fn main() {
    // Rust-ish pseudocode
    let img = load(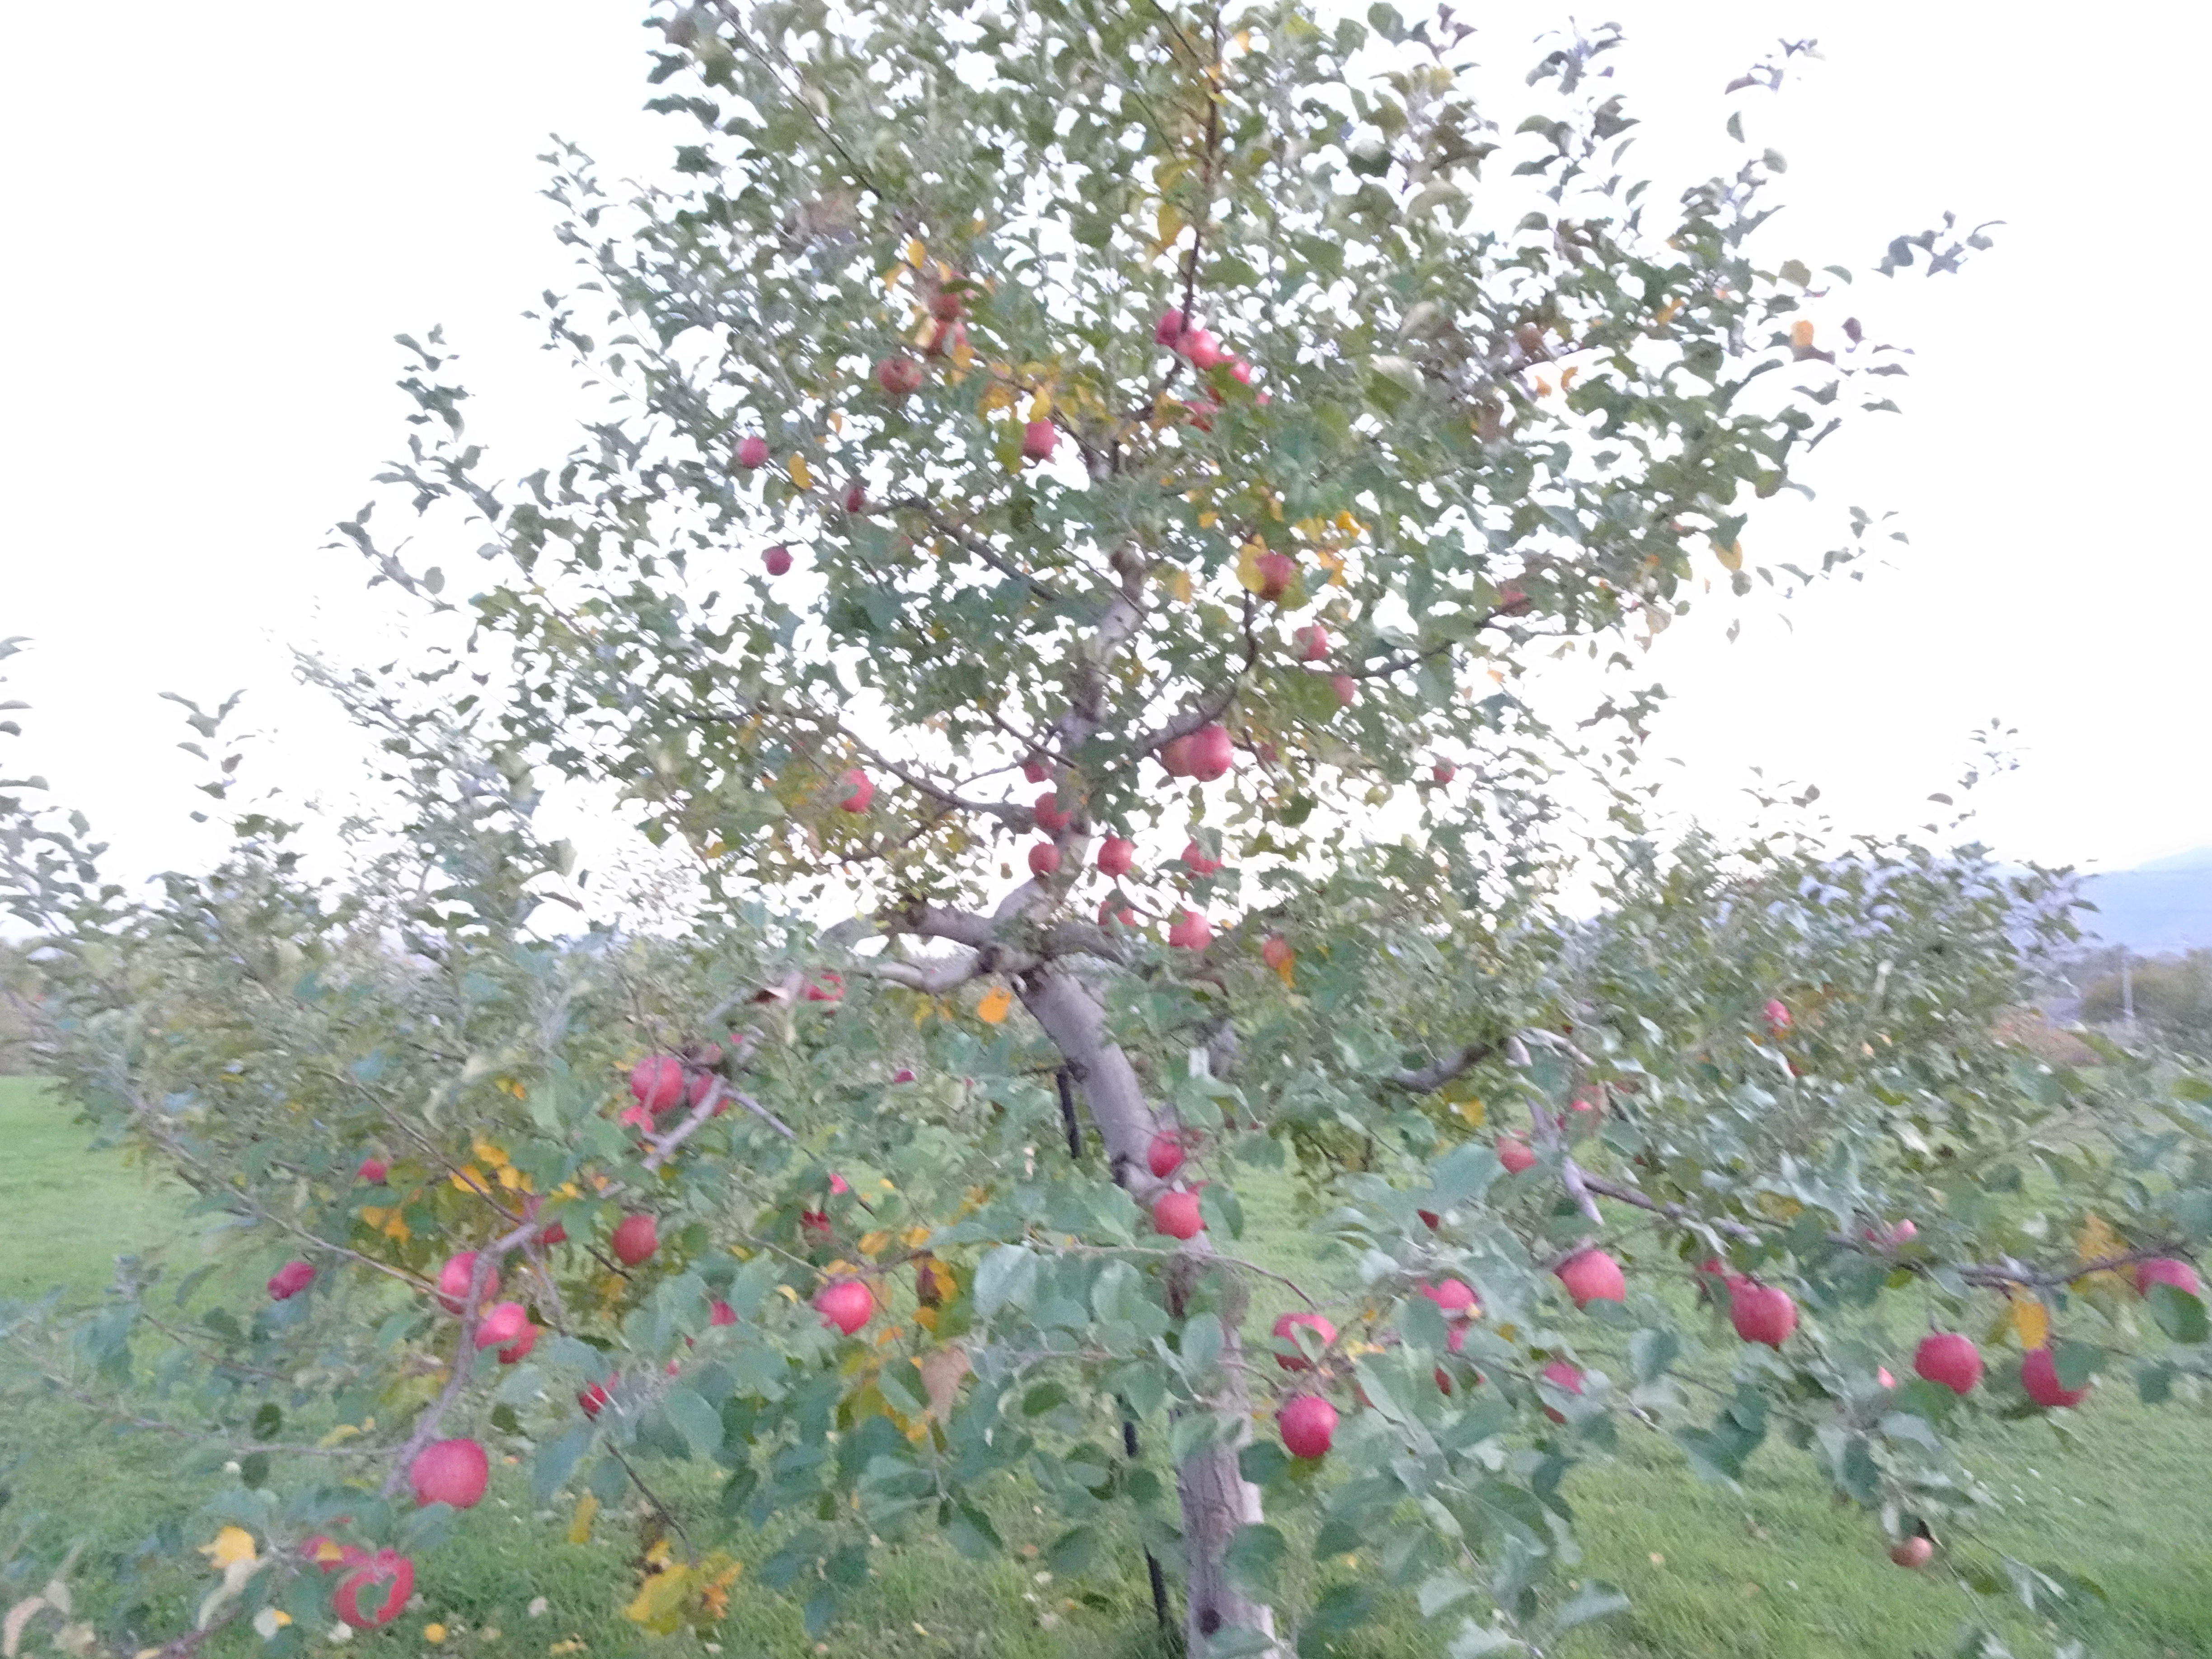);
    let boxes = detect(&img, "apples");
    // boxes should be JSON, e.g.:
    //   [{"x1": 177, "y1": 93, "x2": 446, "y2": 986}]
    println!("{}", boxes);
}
[
  {"x1": 616, "y1": 1107, "x2": 655, "y2": 1150},
  {"x1": 1481, "y1": 427, "x2": 1501, "y2": 445},
  {"x1": 2021, "y1": 1342, "x2": 2092, "y2": 1407},
  {"x1": 1410, "y1": 1270, "x2": 1477, "y2": 1352},
  {"x1": 1152, "y1": 1190, "x2": 1204, "y2": 1240},
  {"x1": 1890, "y1": 1534, "x2": 1933, "y2": 1569},
  {"x1": 691, "y1": 1073, "x2": 730, "y2": 1120},
  {"x1": 613, "y1": 1215, "x2": 670, "y2": 1275},
  {"x1": 436, "y1": 1250, "x2": 501, "y2": 1314},
  {"x1": 1786, "y1": 1062, "x2": 1810, "y2": 1084},
  {"x1": 877, "y1": 352, "x2": 927, "y2": 397},
  {"x1": 1539, "y1": 1356, "x2": 1606, "y2": 1425},
  {"x1": 1645, "y1": 551, "x2": 1670, "y2": 572},
  {"x1": 1033, "y1": 792, "x2": 1075, "y2": 831},
  {"x1": 410, "y1": 1438, "x2": 490, "y2": 1511},
  {"x1": 2136, "y1": 1255, "x2": 2200, "y2": 1320},
  {"x1": 1516, "y1": 327, "x2": 1544, "y2": 353},
  {"x1": 803, "y1": 1216, "x2": 848, "y2": 1251},
  {"x1": 686, "y1": 1291, "x2": 739, "y2": 1346},
  {"x1": 581, "y1": 1364, "x2": 631, "y2": 1415},
  {"x1": 1281, "y1": 1393, "x2": 1340, "y2": 1459},
  {"x1": 633, "y1": 1057, "x2": 686, "y2": 1112},
  {"x1": 1196, "y1": 164, "x2": 1226, "y2": 186},
  {"x1": 839, "y1": 482, "x2": 870, "y2": 513},
  {"x1": 1322, "y1": 671, "x2": 1356, "y2": 706},
  {"x1": 1241, "y1": 390, "x2": 1277, "y2": 421},
  {"x1": 1209, "y1": 354, "x2": 1252, "y2": 398},
  {"x1": 267, "y1": 1258, "x2": 320, "y2": 1305},
  {"x1": 1561, "y1": 998, "x2": 1599, "y2": 1037},
  {"x1": 1494, "y1": 575, "x2": 1537, "y2": 618},
  {"x1": 1177, "y1": 328, "x2": 1220, "y2": 368},
  {"x1": 790, "y1": 738, "x2": 818, "y2": 761},
  {"x1": 1154, "y1": 307, "x2": 1194, "y2": 345},
  {"x1": 1249, "y1": 553, "x2": 1298, "y2": 604},
  {"x1": 1224, "y1": 1114, "x2": 1243, "y2": 1134},
  {"x1": 1097, "y1": 894, "x2": 1135, "y2": 939},
  {"x1": 1727, "y1": 1282, "x2": 1796, "y2": 1342},
  {"x1": 643, "y1": 1349, "x2": 683, "y2": 1390},
  {"x1": 708, "y1": 1032, "x2": 757, "y2": 1077},
  {"x1": 1420, "y1": 1355, "x2": 1488, "y2": 1415},
  {"x1": 1146, "y1": 1127, "x2": 1205, "y2": 1180},
  {"x1": 1913, "y1": 1330, "x2": 1984, "y2": 1396},
  {"x1": 1024, "y1": 750, "x2": 1052, "y2": 784},
  {"x1": 297, "y1": 1516, "x2": 358, "y2": 1578},
  {"x1": 803, "y1": 1170, "x2": 850, "y2": 1221},
  {"x1": 1429, "y1": 313, "x2": 1456, "y2": 340},
  {"x1": 765, "y1": 546, "x2": 792, "y2": 575},
  {"x1": 1492, "y1": 1127, "x2": 1545, "y2": 1175},
  {"x1": 1745, "y1": 991, "x2": 1792, "y2": 1044},
  {"x1": 816, "y1": 1281, "x2": 874, "y2": 1337},
  {"x1": 923, "y1": 271, "x2": 972, "y2": 323},
  {"x1": 1186, "y1": 726, "x2": 1233, "y2": 782},
  {"x1": 334, "y1": 1548, "x2": 415, "y2": 1629},
  {"x1": 1161, "y1": 735, "x2": 1207, "y2": 778},
  {"x1": 1263, "y1": 934, "x2": 1303, "y2": 971},
  {"x1": 918, "y1": 316, "x2": 969, "y2": 366},
  {"x1": 1553, "y1": 1239, "x2": 1628, "y2": 1317},
  {"x1": 1256, "y1": 744, "x2": 1287, "y2": 776},
  {"x1": 1859, "y1": 1366, "x2": 1898, "y2": 1404},
  {"x1": 1863, "y1": 1211, "x2": 1918, "y2": 1262},
  {"x1": 1113, "y1": 539, "x2": 1138, "y2": 563},
  {"x1": 738, "y1": 436, "x2": 770, "y2": 468},
  {"x1": 915, "y1": 1261, "x2": 968, "y2": 1312},
  {"x1": 1180, "y1": 396, "x2": 1222, "y2": 439},
  {"x1": 953, "y1": 1074, "x2": 978, "y2": 1099},
  {"x1": 1432, "y1": 760, "x2": 1458, "y2": 784},
  {"x1": 1195, "y1": 389, "x2": 1242, "y2": 423},
  {"x1": 1694, "y1": 1248, "x2": 1752, "y2": 1303},
  {"x1": 1247, "y1": 1119, "x2": 1266, "y2": 1137},
  {"x1": 1473, "y1": 404, "x2": 1501, "y2": 428},
  {"x1": 1271, "y1": 1313, "x2": 1338, "y2": 1374},
  {"x1": 1611, "y1": 1079, "x2": 1633, "y2": 1099},
  {"x1": 520, "y1": 1192, "x2": 577, "y2": 1245},
  {"x1": 1028, "y1": 841, "x2": 1064, "y2": 877},
  {"x1": 1292, "y1": 625, "x2": 1328, "y2": 663},
  {"x1": 1167, "y1": 910, "x2": 1213, "y2": 956},
  {"x1": 1555, "y1": 1082, "x2": 1616, "y2": 1130},
  {"x1": 1862, "y1": 1030, "x2": 1894, "y2": 1061},
  {"x1": 1599, "y1": 578, "x2": 1623, "y2": 599},
  {"x1": 1182, "y1": 839, "x2": 1225, "y2": 886},
  {"x1": 476, "y1": 1301, "x2": 538, "y2": 1363},
  {"x1": 806, "y1": 971, "x2": 848, "y2": 1015},
  {"x1": 1019, "y1": 417, "x2": 1055, "y2": 460},
  {"x1": 1096, "y1": 835, "x2": 1135, "y2": 877},
  {"x1": 834, "y1": 768, "x2": 875, "y2": 815},
  {"x1": 353, "y1": 1148, "x2": 398, "y2": 1185},
  {"x1": 893, "y1": 1069, "x2": 918, "y2": 1093},
  {"x1": 1344, "y1": 1352, "x2": 1405, "y2": 1411}
]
